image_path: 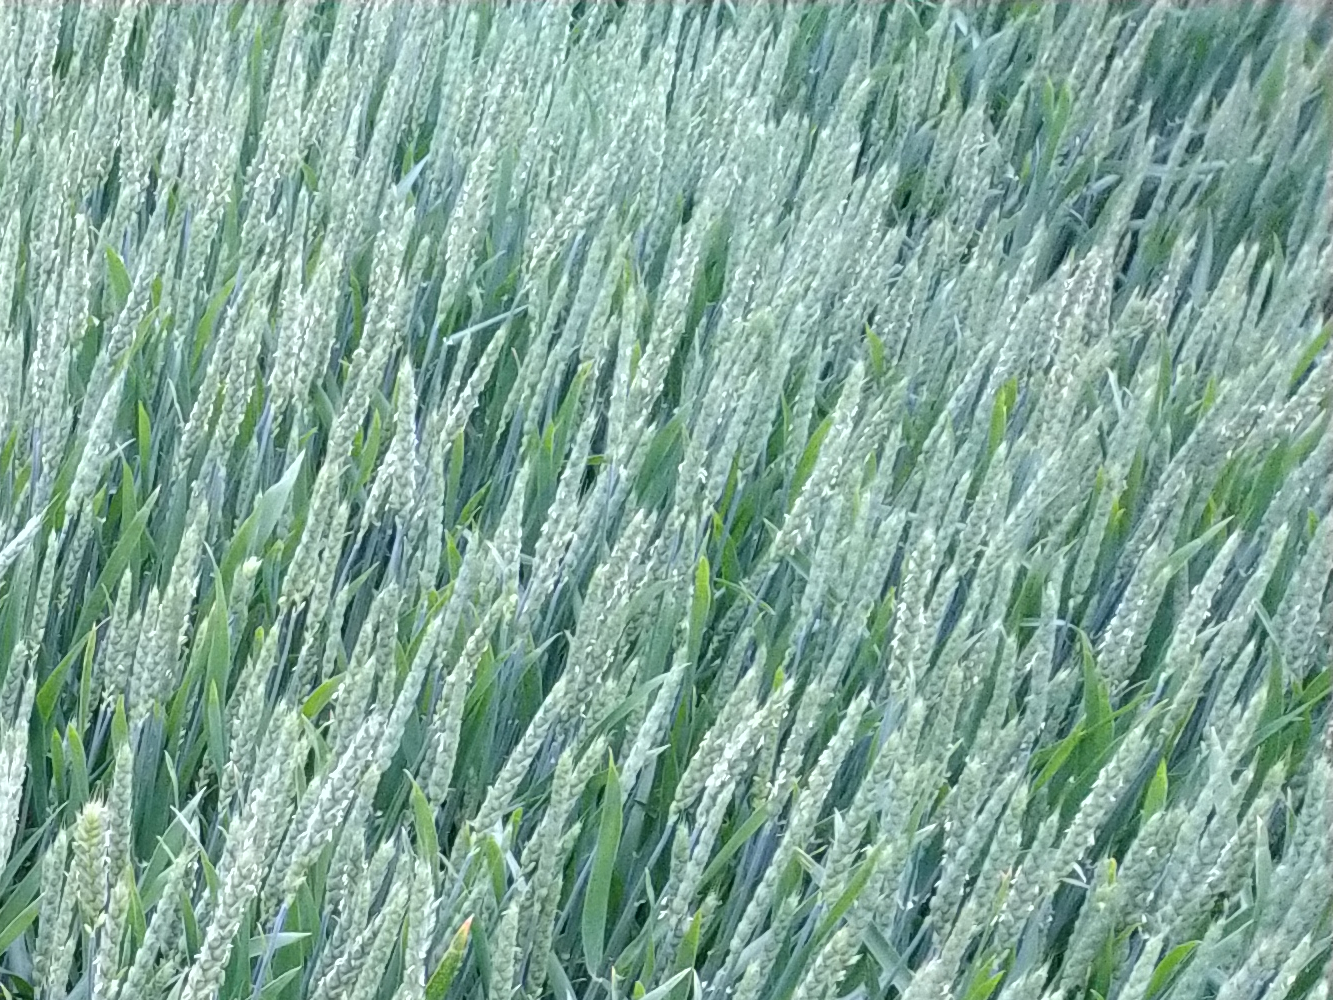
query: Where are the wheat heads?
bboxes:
[834,385,907,479]
[422,445,446,590]
[463,17,503,137]
[350,53,368,105]
[763,30,785,94]
[436,601,502,713]
[488,37,528,129]
[538,207,552,243]
[198,20,225,87]
[1080,248,1116,342]
[722,0,767,85]
[551,101,585,204]
[251,794,270,860]
[773,209,831,304]
[1217,59,1249,128]
[1113,571,1171,684]
[684,358,704,404]
[814,31,846,109]
[289,628,322,705]
[80,87,114,201]
[582,103,645,224]
[274,738,311,804]
[528,168,597,276]
[460,13,477,63]
[22,86,39,136]
[1305,588,1333,666]
[54,61,80,125]
[645,149,687,261]
[406,494,429,551]
[697,961,765,1000]
[969,265,991,336]
[83,626,110,708]
[1129,100,1153,172]
[1183,246,1244,369]
[1112,388,1154,475]
[1147,927,1225,1000]
[1275,867,1333,965]
[225,559,261,659]
[375,596,398,710]
[169,184,193,236]
[769,683,820,810]
[1161,622,1244,734]
[871,165,899,243]
[609,426,657,521]
[309,144,339,230]
[1049,0,1093,66]
[1308,246,1333,295]
[1168,295,1197,353]
[299,266,325,329]
[217,335,252,454]
[17,549,36,634]
[438,825,470,923]
[174,43,198,118]
[812,104,860,192]
[405,0,424,37]
[1096,941,1160,1000]
[706,62,724,137]
[1053,438,1095,516]
[0,38,9,128]
[47,156,69,259]
[652,231,682,317]
[464,167,499,274]
[912,963,949,1000]
[648,679,681,762]
[530,503,578,602]
[1116,811,1185,928]
[324,772,378,916]
[436,537,480,656]
[853,848,895,952]
[28,531,60,656]
[160,821,199,958]
[886,536,936,686]
[306,901,351,997]
[1296,104,1332,167]
[694,113,724,198]
[922,617,973,699]
[1248,265,1272,327]
[712,630,752,710]
[1082,18,1121,74]
[287,54,306,159]
[1288,245,1313,282]
[1008,969,1047,1000]
[888,775,910,841]
[999,85,1028,133]
[310,465,328,509]
[376,40,409,119]
[349,893,409,1000]
[1010,628,1041,693]
[97,110,117,177]
[982,0,1000,36]
[505,592,533,638]
[33,944,75,1000]
[869,424,903,507]
[336,665,376,752]
[1231,246,1260,302]
[366,72,413,211]
[1195,806,1263,923]
[549,752,573,815]
[68,217,90,337]
[818,21,850,110]
[326,76,348,135]
[587,25,617,96]
[339,108,360,207]
[7,335,26,425]
[877,271,914,344]
[162,238,176,315]
[518,13,536,89]
[503,479,523,591]
[937,353,970,413]
[132,591,161,714]
[1141,276,1169,328]
[827,541,849,584]
[75,805,109,922]
[896,45,917,141]
[770,5,793,91]
[322,462,339,537]
[317,212,339,276]
[1227,372,1278,440]
[981,209,999,266]
[1045,0,1077,63]
[0,213,19,334]
[668,199,710,303]
[622,650,688,789]
[153,590,177,698]
[378,859,436,1000]
[214,0,230,26]
[309,259,342,381]
[1259,99,1290,156]
[951,178,991,268]
[342,834,365,919]
[430,42,471,152]
[771,110,793,158]
[31,138,60,254]
[1226,82,1249,160]
[1018,248,1038,305]
[1213,155,1241,228]
[351,120,386,226]
[485,40,509,120]
[851,190,883,261]
[719,337,760,422]
[263,779,321,910]
[364,443,398,522]
[176,217,210,330]
[0,645,26,765]
[567,567,607,694]
[1166,534,1239,666]
[1027,368,1058,440]
[858,23,871,84]
[912,349,952,435]
[222,60,248,125]
[122,88,138,184]
[1117,472,1183,578]
[241,330,264,404]
[929,780,1012,918]
[475,860,489,886]
[977,637,1019,752]
[259,0,286,68]
[0,56,14,163]
[526,136,549,214]
[242,117,268,194]
[562,368,598,464]
[729,26,771,138]
[971,784,1032,921]
[519,739,607,873]
[761,900,798,983]
[646,273,682,367]
[371,192,397,298]
[1096,61,1122,151]
[556,606,629,740]
[34,139,46,192]
[866,229,908,310]
[1249,279,1296,348]
[843,81,873,123]
[42,848,53,897]
[135,94,150,140]
[638,50,662,91]
[782,119,809,195]
[777,197,822,276]
[870,65,900,142]
[8,483,31,539]
[520,353,557,450]
[1165,386,1233,489]
[1170,0,1196,54]
[802,131,827,183]
[597,514,646,614]
[660,8,682,87]
[1210,706,1240,765]
[653,924,685,980]
[524,324,552,402]
[991,306,1028,387]
[697,30,715,77]
[110,187,136,252]
[0,0,15,28]
[414,25,442,127]
[138,9,165,94]
[1035,275,1067,368]
[283,719,388,877]
[201,134,242,236]
[187,87,207,172]
[679,320,707,380]
[793,315,819,375]
[250,0,266,36]
[0,732,12,907]
[302,57,340,138]
[996,104,1024,189]
[1062,247,1095,329]
[757,244,787,301]
[929,346,955,400]
[795,694,870,816]
[76,0,98,55]
[727,104,750,165]
[956,446,1007,565]
[961,345,993,398]
[41,353,70,468]
[402,555,421,608]
[915,259,977,385]
[605,662,637,718]
[974,273,1009,349]
[917,236,941,322]
[832,75,854,124]
[544,86,572,140]
[393,239,431,341]
[669,786,733,924]
[869,518,905,599]
[771,287,797,331]
[176,582,195,659]
[1001,717,1028,760]
[701,378,756,509]
[58,503,94,607]
[568,241,604,344]
[87,214,112,292]
[1096,740,1151,830]
[1258,360,1333,448]
[40,249,55,286]
[291,915,382,1000]
[910,570,957,681]
[949,302,971,340]
[367,413,394,476]
[508,84,551,211]
[1098,0,1164,103]
[959,164,986,227]
[377,619,441,765]
[1069,483,1115,606]
[537,281,569,353]
[672,673,758,802]
[191,619,208,664]
[681,16,700,73]
[0,521,38,599]
[1144,96,1204,231]
[831,235,893,329]
[362,264,392,352]
[841,178,863,234]
[1011,454,1059,518]
[0,336,15,430]
[856,167,889,233]
[480,905,520,1000]
[964,570,996,628]
[708,553,773,650]
[1144,725,1152,733]
[978,563,1015,678]
[572,128,594,190]
[327,341,392,461]
[444,0,468,98]
[1307,427,1331,476]
[534,416,596,565]
[414,416,438,489]
[1218,693,1268,773]
[987,474,1015,538]
[259,0,276,33]
[1218,525,1289,652]
[1285,483,1310,518]
[97,960,179,1000]
[441,327,509,445]
[1044,501,1087,558]
[102,253,120,344]
[482,878,498,934]
[1064,406,1087,433]
[156,79,187,188]
[361,0,393,77]
[933,762,984,937]
[103,253,149,396]
[343,349,362,413]
[33,0,66,80]
[269,265,303,404]
[265,25,290,136]
[740,352,789,469]
[1223,942,1269,1000]
[719,226,771,341]
[87,964,129,1000]
[1284,23,1305,137]
[935,907,976,984]
[498,345,538,425]
[1188,311,1229,402]
[139,190,169,257]
[18,0,38,65]
[136,121,169,177]
[418,0,433,36]
[119,612,142,688]
[1251,129,1292,212]
[879,704,924,840]
[275,715,298,779]
[250,705,287,796]
[40,76,53,127]
[1116,295,1146,357]
[781,307,806,359]
[128,212,138,274]
[943,111,971,175]
[1025,651,1052,724]
[324,588,349,678]
[1183,231,1196,264]
[1302,476,1333,551]
[800,500,843,614]
[600,60,626,110]
[389,361,418,512]
[617,53,641,118]
[180,677,199,746]
[752,705,780,799]
[600,208,618,252]
[524,877,565,999]
[990,7,1021,74]
[1308,198,1333,249]
[1175,776,1253,910]
[389,209,417,291]
[76,350,105,441]
[156,239,170,278]
[771,115,800,193]
[430,887,480,976]
[1054,366,1089,453]
[673,376,725,508]
[1047,724,1143,884]
[923,100,959,201]
[438,145,494,317]
[234,0,255,39]
[0,139,29,248]
[430,680,467,801]
[240,118,283,257]
[446,335,471,408]
[692,25,732,99]
[1157,480,1191,560]
[793,237,841,350]
[104,569,132,690]
[1313,172,1333,227]
[1161,238,1183,303]
[407,737,439,805]
[692,895,721,942]
[1172,560,1189,624]
[1047,194,1075,246]
[1053,63,1101,157]
[707,184,735,222]
[108,745,133,881]
[815,615,867,712]
[530,814,565,922]
[1060,902,1113,990]
[731,32,771,106]
[649,0,664,57]
[85,400,116,498]
[28,251,38,301]
[235,442,259,526]
[612,0,646,65]
[1265,336,1301,426]
[332,219,351,277]
[1042,428,1087,500]
[907,436,951,553]
[987,244,1004,287]
[332,605,380,719]
[671,823,692,900]
[205,34,234,102]
[1126,319,1172,403]
[1068,0,1105,86]
[36,282,55,405]
[295,266,325,395]
[522,3,554,111]
[1064,863,1107,964]
[723,91,741,153]
[931,24,955,113]
[620,688,646,757]
[579,0,605,47]
[357,0,373,46]
[443,163,477,251]
[624,318,685,444]
[1214,295,1246,378]
[1159,787,1212,905]
[734,818,804,953]
[1229,368,1259,412]
[935,447,975,514]
[1044,673,1079,750]
[328,0,355,65]
[771,461,829,557]
[878,13,898,68]
[33,408,75,516]
[957,399,994,467]
[98,0,130,102]
[1267,764,1328,917]
[1280,533,1333,681]
[280,187,309,305]
[184,842,262,1000]
[1011,315,1035,383]
[802,223,831,286]
[220,637,277,800]
[524,170,548,257]
[1146,430,1175,503]
[786,348,822,463]
[101,881,132,963]
[843,496,872,592]
[289,0,310,36]
[661,65,690,156]
[925,385,964,449]
[616,121,641,183]
[42,866,79,1000]
[31,833,67,981]
[1262,470,1300,530]
[14,677,40,729]
[820,365,865,461]
[1228,767,1286,895]
[296,550,319,606]
[662,113,689,189]
[480,467,531,585]
[890,278,918,364]
[691,712,768,815]
[211,274,259,374]
[1105,138,1158,246]
[638,94,666,222]
[364,844,394,905]
[167,0,193,74]
[1270,297,1312,353]
[581,238,631,359]
[996,226,1043,330]
[766,926,854,1000]
[306,506,350,631]
[1042,319,1084,434]
[1183,467,1224,529]
[633,637,650,692]
[646,211,668,260]
[648,513,682,621]
[961,96,980,193]
[1096,549,1159,670]
[923,670,962,765]
[69,84,96,191]
[1047,554,1069,599]
[171,375,219,476]
[196,823,246,936]
[115,875,186,1000]
[820,734,900,897]
[787,604,817,659]
[988,814,1059,954]
[1268,518,1329,644]
[848,517,890,620]
[960,643,984,694]
[0,219,12,326]
[167,504,207,595]
[61,204,75,277]
[608,290,638,447]
[1204,646,1255,739]
[258,198,288,264]
[1223,938,1312,1000]
[437,206,452,263]
[874,840,909,931]
[624,258,632,291]
[913,28,941,110]
[531,248,544,339]
[722,177,758,290]
[1116,815,1166,899]
[350,880,371,939]
[68,380,123,511]
[16,354,38,465]
[1302,38,1333,98]
[579,681,613,744]
[5,728,28,854]
[542,0,576,81]
[141,114,159,148]
[560,473,611,574]
[279,471,339,601]
[85,15,102,71]
[937,475,972,556]
[553,823,582,876]
[621,514,657,587]
[673,520,697,644]
[1116,231,1133,266]
[514,882,535,963]
[1105,370,1149,468]
[1118,23,1134,54]
[1089,273,1114,344]
[1287,164,1319,254]
[1039,0,1054,48]
[471,677,570,835]
[1038,584,1055,649]
[552,108,575,201]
